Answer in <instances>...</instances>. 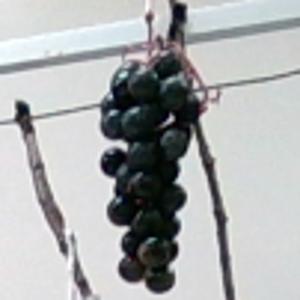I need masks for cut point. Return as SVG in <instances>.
Instances as JSON below:
<instances>
[{
  "instance_id": "1",
  "label": "cut point",
  "mask_w": 300,
  "mask_h": 300,
  "mask_svg": "<svg viewBox=\"0 0 300 300\" xmlns=\"http://www.w3.org/2000/svg\"><path fill=\"white\" fill-rule=\"evenodd\" d=\"M154 0H144L143 22L147 27V51L143 61L145 63L154 55Z\"/></svg>"
}]
</instances>
